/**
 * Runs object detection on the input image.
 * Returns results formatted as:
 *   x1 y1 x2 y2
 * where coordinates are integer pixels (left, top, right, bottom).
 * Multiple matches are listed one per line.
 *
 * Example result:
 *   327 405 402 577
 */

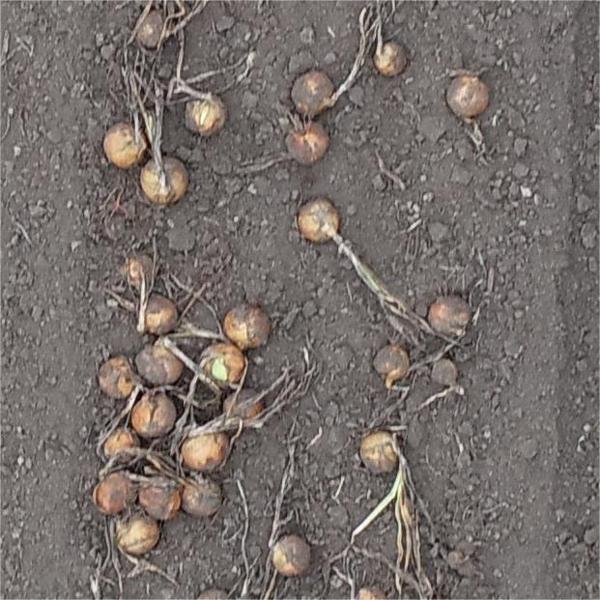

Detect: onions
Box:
293 198 338 240
430 359 457 387
181 474 220 514
131 394 175 435
358 431 397 471
134 11 167 46
223 303 268 347
427 294 470 336
136 343 181 383
103 432 137 464
445 73 488 116
139 476 177 518
115 514 157 554
181 426 229 469
102 123 142 166
286 122 327 162
372 344 408 382
139 156 187 202
231 391 264 422
268 533 311 575
370 39 407 76
122 255 149 286
202 345 243 385
93 472 134 512
187 95 227 134
355 585 385 600
140 295 177 333
290 71 330 114
95 357 135 397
